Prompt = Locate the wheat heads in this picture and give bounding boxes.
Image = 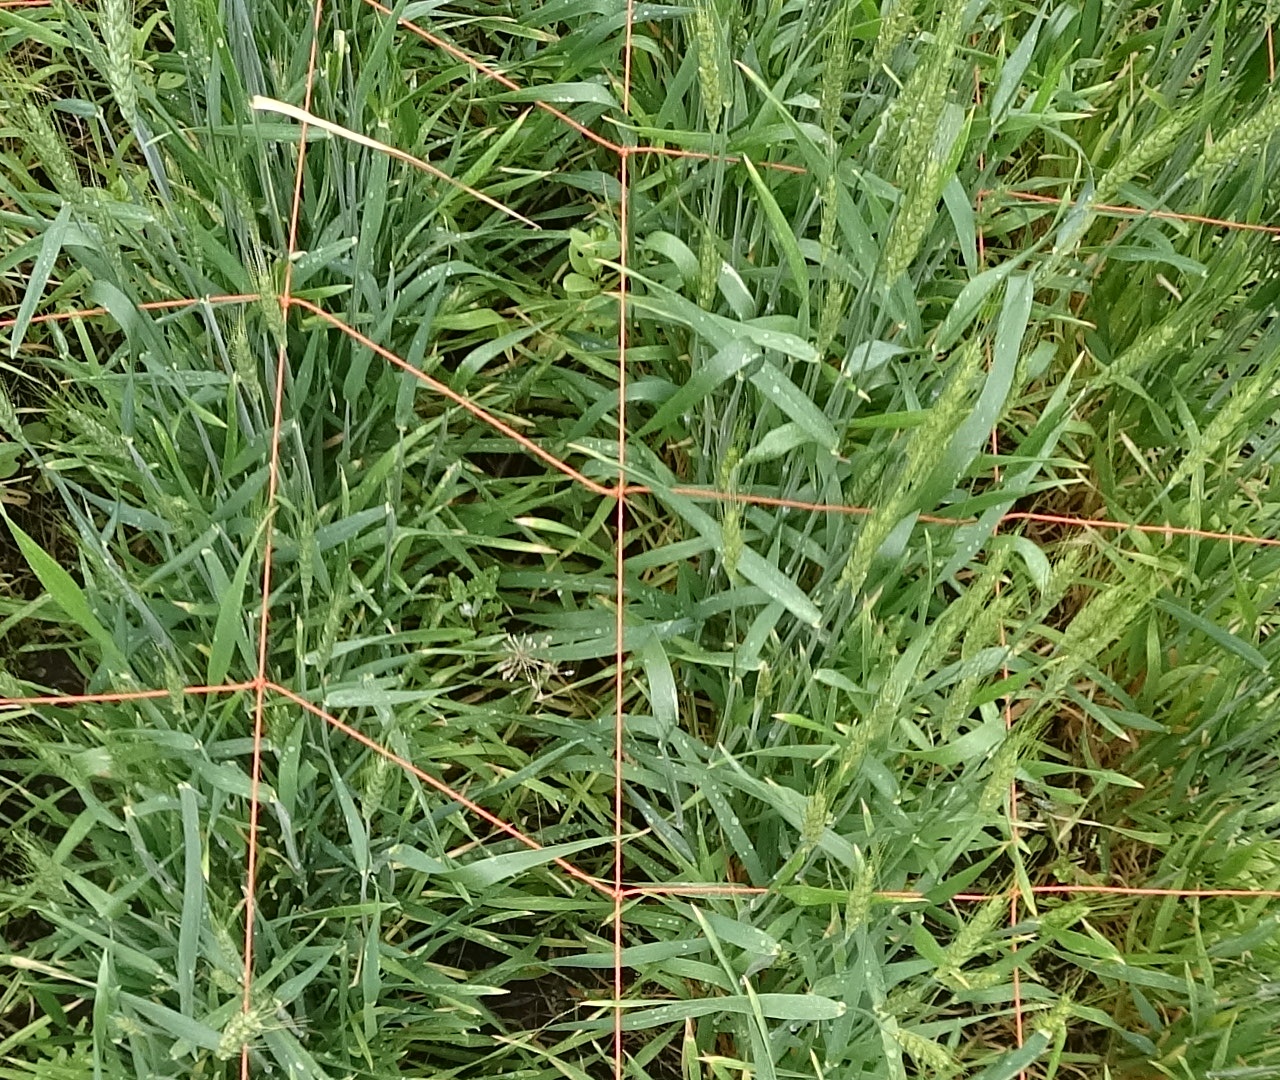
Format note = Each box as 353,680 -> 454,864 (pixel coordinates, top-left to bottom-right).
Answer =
0,377 -> 24,439
1027,904 -> 1083,933
979,747 -> 1018,819
817,283 -> 840,342
944,679 -> 974,729
178,0 -> 209,76
874,614 -> 904,664
0,674 -> 35,713
90,546 -> 131,599
754,660 -> 775,701
1040,997 -> 1074,1033
160,669 -> 190,712
216,932 -> 244,955
872,0 -> 921,66
113,1015 -> 146,1041
965,595 -> 1004,657
875,162 -> 948,282
1069,594 -> 1147,680
817,33 -> 848,135
1044,548 -> 1079,605
71,407 -> 127,459
715,440 -> 742,485
870,692 -> 905,741
27,99 -> 79,201
698,228 -> 717,304
36,744 -> 77,784
937,895 -> 1005,968
943,972 -> 999,986
868,63 -> 928,147
847,722 -> 872,761
315,605 -> 348,663
298,522 -> 313,586
918,543 -> 1006,672
98,0 -> 143,112
842,518 -> 879,584
717,505 -> 741,573
1057,583 -> 1116,641
360,761 -> 387,817
876,987 -> 921,1011
904,353 -> 983,457
695,5 -> 731,133
93,201 -> 126,277
800,789 -> 827,846
890,1031 -> 953,1070
1171,396 -> 1253,484
216,1012 -> 266,1064
269,702 -> 292,745
816,174 -> 842,243
1096,323 -> 1179,381
254,276 -> 289,337
232,325 -> 266,399
28,846 -> 66,894
862,488 -> 907,553
904,48 -> 958,163
212,971 -> 244,992
995,360 -> 1032,415
234,174 -> 260,238
845,867 -> 877,925
1198,94 -> 1280,189
1092,116 -> 1175,194
185,213 -> 203,271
